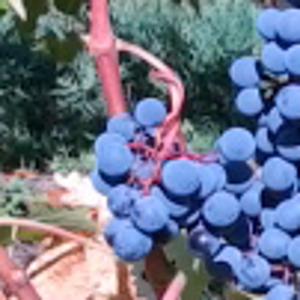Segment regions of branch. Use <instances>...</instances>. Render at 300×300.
<instances>
[{"label": "branch", "mask_w": 300, "mask_h": 300, "mask_svg": "<svg viewBox=\"0 0 300 300\" xmlns=\"http://www.w3.org/2000/svg\"><path fill=\"white\" fill-rule=\"evenodd\" d=\"M109 0H93L90 4L91 31L88 45L108 111L121 116L126 111V98L119 76V55L108 19Z\"/></svg>", "instance_id": "branch-1"}, {"label": "branch", "mask_w": 300, "mask_h": 300, "mask_svg": "<svg viewBox=\"0 0 300 300\" xmlns=\"http://www.w3.org/2000/svg\"><path fill=\"white\" fill-rule=\"evenodd\" d=\"M146 272L161 300H183V294L169 270L165 245L158 243L152 255L145 257Z\"/></svg>", "instance_id": "branch-2"}, {"label": "branch", "mask_w": 300, "mask_h": 300, "mask_svg": "<svg viewBox=\"0 0 300 300\" xmlns=\"http://www.w3.org/2000/svg\"><path fill=\"white\" fill-rule=\"evenodd\" d=\"M0 273L19 300H41L37 289L27 278L26 271L10 259L3 243H0Z\"/></svg>", "instance_id": "branch-3"}]
</instances>
